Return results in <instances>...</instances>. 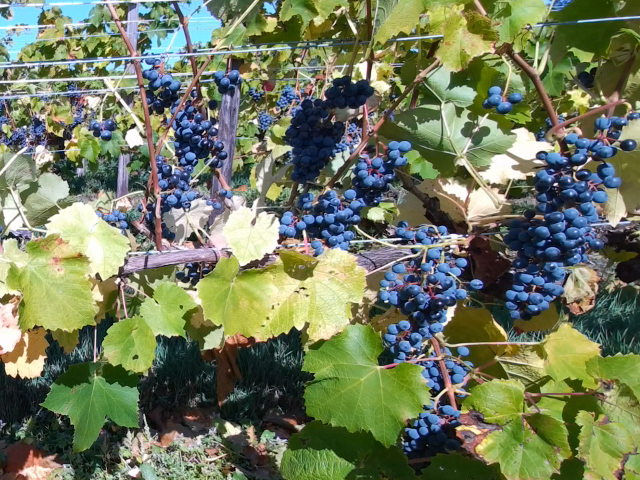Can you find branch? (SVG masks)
Masks as SVG:
<instances>
[{"label":"branch","mask_w":640,"mask_h":480,"mask_svg":"<svg viewBox=\"0 0 640 480\" xmlns=\"http://www.w3.org/2000/svg\"><path fill=\"white\" fill-rule=\"evenodd\" d=\"M513 51V46L509 45L507 48V55L509 57H511V59L522 68V70L531 77V81L534 83L536 90L538 91V94L545 106V108L547 109V112L550 115L551 118V122H552V126L553 127H558L559 126V120L555 114L554 108L550 105V103L548 102L547 99V95L544 91V87L541 84V82L539 81V79L536 77L534 70L531 68V66L519 56L518 52H512Z\"/></svg>","instance_id":"4"},{"label":"branch","mask_w":640,"mask_h":480,"mask_svg":"<svg viewBox=\"0 0 640 480\" xmlns=\"http://www.w3.org/2000/svg\"><path fill=\"white\" fill-rule=\"evenodd\" d=\"M214 56H208L207 60L202 64L200 69L197 72V62L195 61V57H189L191 67H192V75L194 76L191 84L187 87L185 93L183 94L182 101L179 104L177 110L174 114H171L169 117V124L165 126L164 131L162 133V137L158 142L156 148H154V142L152 139V126L149 120V109L147 107V99L145 94V85L144 80L142 78V64L143 61H133V68L137 71V81L139 82V94L142 101V110L144 111V122L147 128V142L149 145L150 157H151V169L149 171L146 192L143 200V205L147 206L150 195L152 183L154 184V200H155V214H156V224H155V241H156V249L162 250L163 240H162V228H161V211H160V200L162 194V187L159 185L158 177H157V168H156V157L159 155L171 128V124L173 123L177 113L182 109L185 101L188 99L192 90L195 86V91L197 93V98L193 102V106L198 109L199 112L205 113V104L203 103V95L202 90L200 89V77L202 76V72L212 63Z\"/></svg>","instance_id":"1"},{"label":"branch","mask_w":640,"mask_h":480,"mask_svg":"<svg viewBox=\"0 0 640 480\" xmlns=\"http://www.w3.org/2000/svg\"><path fill=\"white\" fill-rule=\"evenodd\" d=\"M108 9H109V11L111 12V14H112V16L114 18L115 25L117 27V30L119 31V34L121 35V37L123 38V40L127 44V47H128V49H129V51L131 53V56H140V53L135 51V48H134L130 38L125 33L124 28L122 27V25L120 23V19H119L118 13L115 10V8L113 7V5L109 4L108 5Z\"/></svg>","instance_id":"7"},{"label":"branch","mask_w":640,"mask_h":480,"mask_svg":"<svg viewBox=\"0 0 640 480\" xmlns=\"http://www.w3.org/2000/svg\"><path fill=\"white\" fill-rule=\"evenodd\" d=\"M172 6L179 18V20L181 21L182 26L184 27V37H185V41L187 44V48L189 52H193L194 48L190 39V34H189V17L188 16H184L182 14L181 9L178 6V3L176 1L172 2Z\"/></svg>","instance_id":"8"},{"label":"branch","mask_w":640,"mask_h":480,"mask_svg":"<svg viewBox=\"0 0 640 480\" xmlns=\"http://www.w3.org/2000/svg\"><path fill=\"white\" fill-rule=\"evenodd\" d=\"M262 0H253L252 3L250 4V6L247 8V10L245 11V13H243L241 16H239L237 18V20L235 21V23H233L229 30L226 32V34L223 35V37L218 41V43L214 46L213 51H217L220 49V47L223 45V43L231 36V34L234 32L235 28L238 27V25L245 19L247 18L251 12L253 11V9L255 8V6L258 3H261Z\"/></svg>","instance_id":"6"},{"label":"branch","mask_w":640,"mask_h":480,"mask_svg":"<svg viewBox=\"0 0 640 480\" xmlns=\"http://www.w3.org/2000/svg\"><path fill=\"white\" fill-rule=\"evenodd\" d=\"M439 64H440V61L439 60H435L434 62L430 63L422 71V73L418 77H416L414 80H412L406 86V88L400 93V95L396 98V101L392 104L390 109L382 116V118L378 121V123L374 125V127L371 129V131L368 134H367V129L366 128H367V115H368V107L370 106V100L369 99L365 100V103L363 104L362 121H361V129H360V141L361 142L354 148V150L352 151L351 155L348 157V159L343 164V166L335 172L334 176L331 178V180L326 185L327 189H331L333 187V185L335 184L337 179L340 177V175L344 171H346L347 168L351 165V163L353 162V160L355 159V157L357 156V154L359 153L360 150L362 152L366 151V143L375 135L377 130L380 129L381 126L386 122V120L394 113L396 108L399 106V104L405 98V96L409 93V91L417 83L422 81L427 76V74L433 68L438 66Z\"/></svg>","instance_id":"2"},{"label":"branch","mask_w":640,"mask_h":480,"mask_svg":"<svg viewBox=\"0 0 640 480\" xmlns=\"http://www.w3.org/2000/svg\"><path fill=\"white\" fill-rule=\"evenodd\" d=\"M430 341L432 342L433 348L435 349V351L437 353V356H438V359H439V370H440L441 379L443 381V385H444V388H445L446 397H447L448 402L450 403V405L453 408H456L457 404L454 401L455 394H454L453 386H452L451 380H450V378L448 376L446 362L444 360L442 351L440 349L439 341H438V339L436 337H431Z\"/></svg>","instance_id":"5"},{"label":"branch","mask_w":640,"mask_h":480,"mask_svg":"<svg viewBox=\"0 0 640 480\" xmlns=\"http://www.w3.org/2000/svg\"><path fill=\"white\" fill-rule=\"evenodd\" d=\"M353 228L355 230L359 231L366 238H375L376 242L382 244L383 246L390 247V248L401 249V250H416V249H424V248H436V247H442V246H448V245H466L470 241L475 239L481 232L485 231V227L481 226L479 229H477L475 232H473L470 235L469 238H466L464 240H446V241L433 242V243H422V244H414V245H401V244H398V243L385 242L384 239L368 233L363 227H361L358 224H354Z\"/></svg>","instance_id":"3"},{"label":"branch","mask_w":640,"mask_h":480,"mask_svg":"<svg viewBox=\"0 0 640 480\" xmlns=\"http://www.w3.org/2000/svg\"><path fill=\"white\" fill-rule=\"evenodd\" d=\"M566 135V130L564 128H560L555 133L556 142L559 145V148L565 157H570L571 152L566 143H563V137Z\"/></svg>","instance_id":"9"},{"label":"branch","mask_w":640,"mask_h":480,"mask_svg":"<svg viewBox=\"0 0 640 480\" xmlns=\"http://www.w3.org/2000/svg\"><path fill=\"white\" fill-rule=\"evenodd\" d=\"M214 173H215V177H216V179H217L218 183L220 184V186H221L224 190H230V189H231V186H230V185H228V184L225 182L224 177H223V175H222V170H221V169H215V170H214Z\"/></svg>","instance_id":"10"}]
</instances>
